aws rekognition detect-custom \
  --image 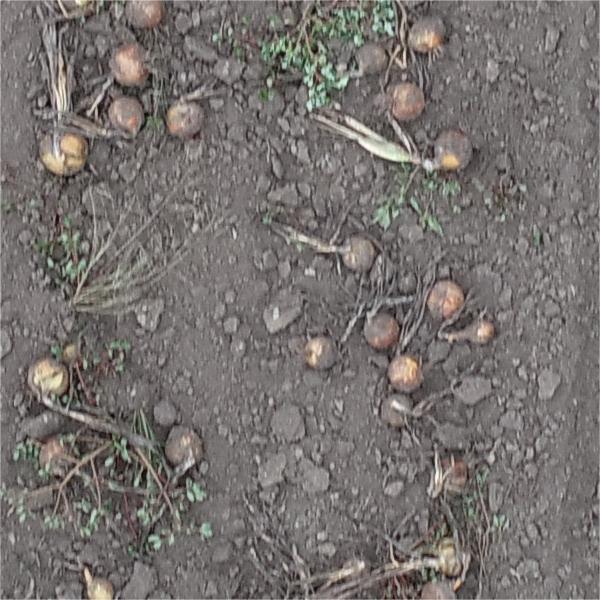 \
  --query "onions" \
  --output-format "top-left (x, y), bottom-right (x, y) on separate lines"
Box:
top-left (341, 234), bottom-right (376, 271)
top-left (165, 428), bottom-right (201, 469)
top-left (29, 358), bottom-right (66, 396)
top-left (407, 17), bottom-right (443, 53)
top-left (40, 131), bottom-right (85, 174)
top-left (424, 280), bottom-right (462, 318)
top-left (381, 391), bottom-right (410, 424)
top-left (300, 334), bottom-right (336, 370)
top-left (108, 44), bottom-right (147, 83)
top-left (59, 339), bottom-right (80, 361)
top-left (28, 413), bottom-right (61, 438)
top-left (386, 82), bottom-right (423, 118)
top-left (120, 0), bottom-right (164, 29)
top-left (432, 126), bottom-right (470, 171)
top-left (435, 539), bottom-right (463, 579)
top-left (39, 435), bottom-right (74, 474)
top-left (362, 311), bottom-right (397, 350)
top-left (107, 94), bottom-right (144, 132)
top-left (354, 42), bottom-right (387, 75)
top-left (443, 459), bottom-right (466, 491)
top-left (471, 318), bottom-right (494, 342)
top-left (165, 99), bottom-right (200, 135)
top-left (385, 353), bottom-right (421, 390)
top-left (82, 568), bottom-right (114, 599)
